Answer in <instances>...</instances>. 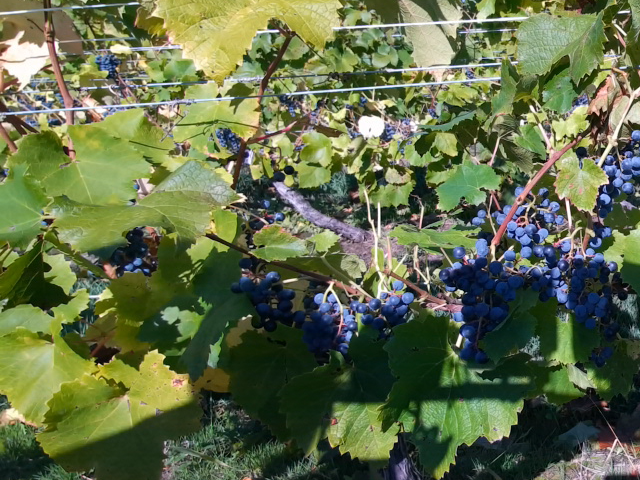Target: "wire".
Segmentation results:
<instances>
[{"instance_id":"a73af890","label":"wire","mask_w":640,"mask_h":480,"mask_svg":"<svg viewBox=\"0 0 640 480\" xmlns=\"http://www.w3.org/2000/svg\"><path fill=\"white\" fill-rule=\"evenodd\" d=\"M528 15H517V16H500V17H490V18H468V19H453V20H435L432 22H388V23H379V24H349V25H336V31L343 30H351V29H382V28H390V27H434L437 25H455V24H471V23H492V22H502V21H519V20H528Z\"/></svg>"},{"instance_id":"d2f4af69","label":"wire","mask_w":640,"mask_h":480,"mask_svg":"<svg viewBox=\"0 0 640 480\" xmlns=\"http://www.w3.org/2000/svg\"><path fill=\"white\" fill-rule=\"evenodd\" d=\"M500 76H490V77H476V78H462V79H440V80H431V81H411V82H403L401 84L396 85H362L359 87H345L340 89H314V90H303V91H283L272 94H248L243 96H225L224 98L217 97H204V98H192L183 101H171V102H156V101H148V100H140L133 101L128 103H120L114 105H97L91 107H67V108H34L30 110H15V111H0V117L7 116L13 117L17 115H32L37 113H69V112H93L100 110H116L122 108H130L136 106H154V107H174V106H185L194 103H206V102H215V103H236L245 100L251 99H274L285 96H305V95H316V94H342L347 92H361L364 90H399L404 89L405 87H413V86H433V85H442V84H464V83H479V82H492V81H500Z\"/></svg>"},{"instance_id":"4f2155b8","label":"wire","mask_w":640,"mask_h":480,"mask_svg":"<svg viewBox=\"0 0 640 480\" xmlns=\"http://www.w3.org/2000/svg\"><path fill=\"white\" fill-rule=\"evenodd\" d=\"M138 0H130V1H112L108 3H92L78 6H67V7H35L22 11H1V16H24L29 14H34L37 12H50V13H61V12H69V11H80V10H88L94 8H110L114 6H132L137 5Z\"/></svg>"}]
</instances>
